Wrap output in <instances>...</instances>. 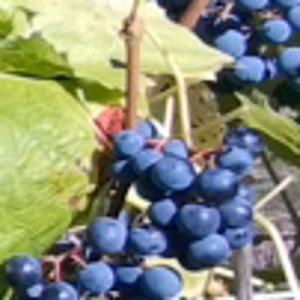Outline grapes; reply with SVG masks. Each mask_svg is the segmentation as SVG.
<instances>
[{
    "mask_svg": "<svg viewBox=\"0 0 300 300\" xmlns=\"http://www.w3.org/2000/svg\"><path fill=\"white\" fill-rule=\"evenodd\" d=\"M237 13L224 16L213 46L231 56L232 78L260 85L281 75H300V47L283 44L300 29V0H237Z\"/></svg>",
    "mask_w": 300,
    "mask_h": 300,
    "instance_id": "b958b902",
    "label": "grapes"
},
{
    "mask_svg": "<svg viewBox=\"0 0 300 300\" xmlns=\"http://www.w3.org/2000/svg\"><path fill=\"white\" fill-rule=\"evenodd\" d=\"M112 134L115 153L104 165L110 180H135L149 206V223L133 225L132 214L96 215L87 224L59 230L34 257H12L4 281L24 300H81L82 295L135 292L169 296L182 286L171 266L139 264L174 260L185 271L224 263L253 241V193L240 177L262 152L259 135L230 128L223 146L196 148L145 118Z\"/></svg>",
    "mask_w": 300,
    "mask_h": 300,
    "instance_id": "01657485",
    "label": "grapes"
}]
</instances>
